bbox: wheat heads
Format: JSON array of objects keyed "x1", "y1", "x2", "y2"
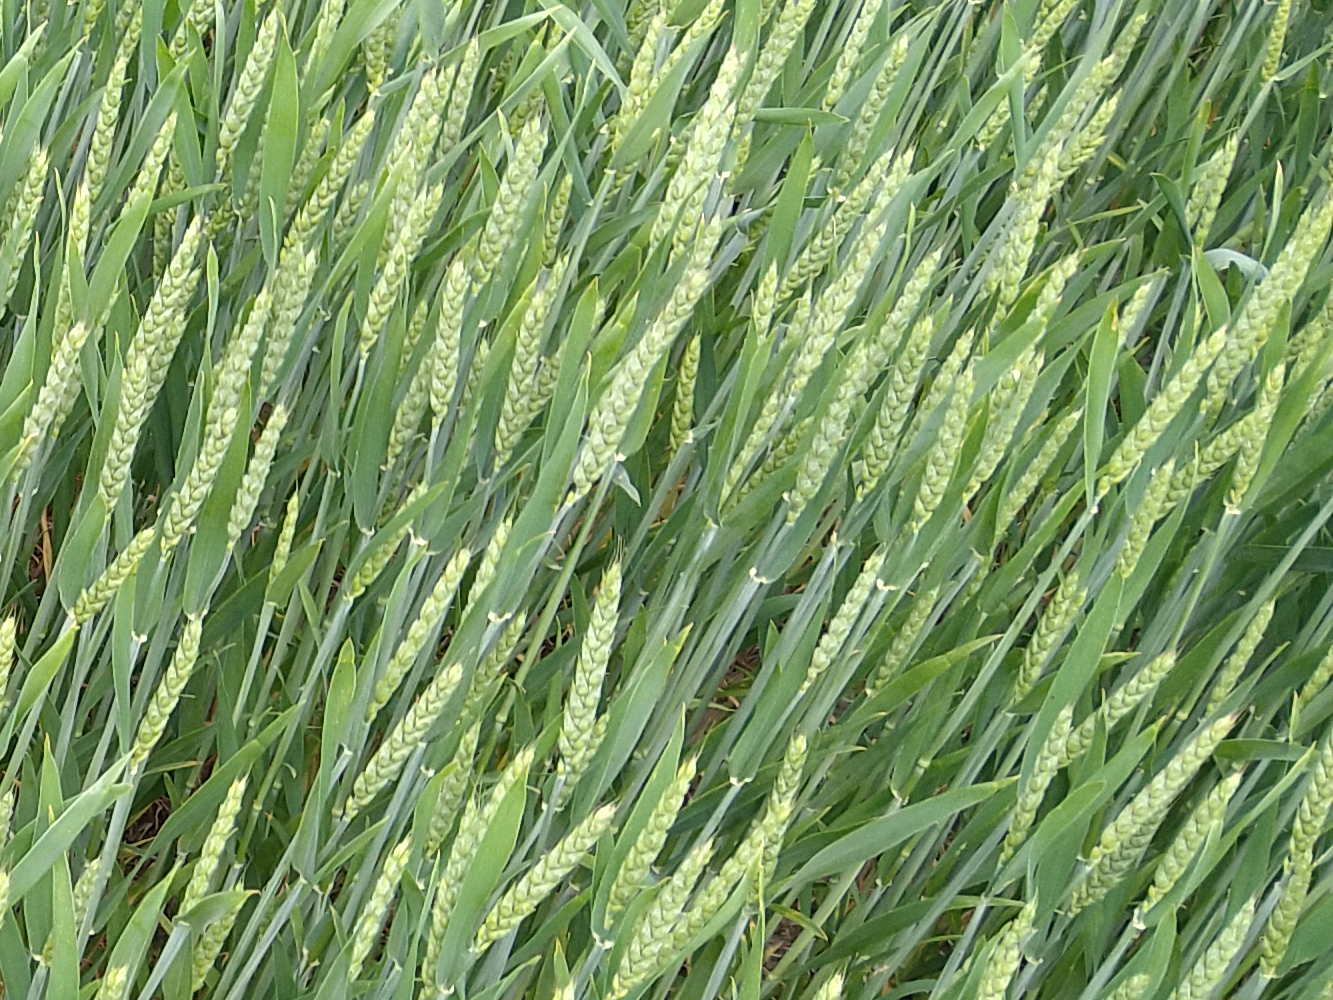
[
  {"x1": 1155, "y1": 402, "x2": 1273, "y2": 517},
  {"x1": 1198, "y1": 139, "x2": 1239, "y2": 247},
  {"x1": 1032, "y1": 63, "x2": 1111, "y2": 174},
  {"x1": 348, "y1": 838, "x2": 414, "y2": 979},
  {"x1": 263, "y1": 494, "x2": 294, "y2": 595},
  {"x1": 622, "y1": 14, "x2": 667, "y2": 112},
  {"x1": 479, "y1": 28, "x2": 528, "y2": 96},
  {"x1": 1261, "y1": 862, "x2": 1315, "y2": 972},
  {"x1": 57, "y1": 186, "x2": 90, "y2": 311},
  {"x1": 192, "y1": 901, "x2": 243, "y2": 987},
  {"x1": 1105, "y1": 461, "x2": 1171, "y2": 571},
  {"x1": 649, "y1": 275, "x2": 709, "y2": 343},
  {"x1": 1099, "y1": 330, "x2": 1227, "y2": 490},
  {"x1": 229, "y1": 95, "x2": 277, "y2": 201},
  {"x1": 280, "y1": 109, "x2": 376, "y2": 260},
  {"x1": 1299, "y1": 983, "x2": 1333, "y2": 1000},
  {"x1": 1115, "y1": 281, "x2": 1154, "y2": 348},
  {"x1": 990, "y1": 409, "x2": 1080, "y2": 530},
  {"x1": 1229, "y1": 360, "x2": 1287, "y2": 510},
  {"x1": 800, "y1": 222, "x2": 884, "y2": 354},
  {"x1": 1277, "y1": 752, "x2": 1333, "y2": 884},
  {"x1": 542, "y1": 176, "x2": 572, "y2": 257},
  {"x1": 997, "y1": 704, "x2": 1075, "y2": 863},
  {"x1": 704, "y1": 817, "x2": 781, "y2": 912},
  {"x1": 751, "y1": 735, "x2": 809, "y2": 884},
  {"x1": 180, "y1": 779, "x2": 248, "y2": 913},
  {"x1": 780, "y1": 289, "x2": 816, "y2": 356},
  {"x1": 496, "y1": 267, "x2": 570, "y2": 462},
  {"x1": 791, "y1": 153, "x2": 892, "y2": 287},
  {"x1": 203, "y1": 15, "x2": 284, "y2": 168},
  {"x1": 340, "y1": 667, "x2": 464, "y2": 814},
  {"x1": 155, "y1": 154, "x2": 190, "y2": 288},
  {"x1": 1053, "y1": 102, "x2": 1120, "y2": 189},
  {"x1": 827, "y1": 39, "x2": 912, "y2": 182},
  {"x1": 426, "y1": 807, "x2": 476, "y2": 968},
  {"x1": 466, "y1": 610, "x2": 527, "y2": 720},
  {"x1": 1293, "y1": 652, "x2": 1333, "y2": 719},
  {"x1": 379, "y1": 74, "x2": 435, "y2": 172},
  {"x1": 0, "y1": 786, "x2": 15, "y2": 887},
  {"x1": 1061, "y1": 651, "x2": 1178, "y2": 767},
  {"x1": 473, "y1": 514, "x2": 513, "y2": 601},
  {"x1": 789, "y1": 356, "x2": 870, "y2": 501},
  {"x1": 47, "y1": 860, "x2": 103, "y2": 956},
  {"x1": 614, "y1": 16, "x2": 649, "y2": 83},
  {"x1": 80, "y1": 58, "x2": 127, "y2": 197},
  {"x1": 1255, "y1": 0, "x2": 1302, "y2": 76},
  {"x1": 798, "y1": 551, "x2": 885, "y2": 691},
  {"x1": 821, "y1": 0, "x2": 891, "y2": 101},
  {"x1": 208, "y1": 284, "x2": 275, "y2": 423},
  {"x1": 673, "y1": 107, "x2": 739, "y2": 249},
  {"x1": 1206, "y1": 241, "x2": 1308, "y2": 396},
  {"x1": 73, "y1": 532, "x2": 153, "y2": 625},
  {"x1": 129, "y1": 220, "x2": 202, "y2": 367},
  {"x1": 365, "y1": 548, "x2": 473, "y2": 719},
  {"x1": 431, "y1": 257, "x2": 471, "y2": 423},
  {"x1": 398, "y1": 291, "x2": 435, "y2": 362},
  {"x1": 1030, "y1": 0, "x2": 1081, "y2": 53},
  {"x1": 905, "y1": 374, "x2": 973, "y2": 528},
  {"x1": 1209, "y1": 599, "x2": 1276, "y2": 723},
  {"x1": 117, "y1": 0, "x2": 185, "y2": 63},
  {"x1": 690, "y1": 221, "x2": 724, "y2": 289},
  {"x1": 577, "y1": 330, "x2": 669, "y2": 489},
  {"x1": 365, "y1": 184, "x2": 443, "y2": 335},
  {"x1": 716, "y1": 360, "x2": 819, "y2": 505},
  {"x1": 670, "y1": 336, "x2": 702, "y2": 443},
  {"x1": 870, "y1": 253, "x2": 943, "y2": 374},
  {"x1": 279, "y1": 119, "x2": 332, "y2": 216},
  {"x1": 604, "y1": 755, "x2": 698, "y2": 935},
  {"x1": 974, "y1": 146, "x2": 1061, "y2": 307},
  {"x1": 427, "y1": 720, "x2": 482, "y2": 854},
  {"x1": 1087, "y1": 719, "x2": 1237, "y2": 867},
  {"x1": 231, "y1": 405, "x2": 290, "y2": 532},
  {"x1": 1143, "y1": 898, "x2": 1255, "y2": 1000},
  {"x1": 961, "y1": 354, "x2": 1045, "y2": 501},
  {"x1": 0, "y1": 151, "x2": 52, "y2": 295},
  {"x1": 1092, "y1": 14, "x2": 1149, "y2": 94},
  {"x1": 476, "y1": 123, "x2": 546, "y2": 264},
  {"x1": 471, "y1": 806, "x2": 616, "y2": 956},
  {"x1": 731, "y1": 0, "x2": 818, "y2": 132},
  {"x1": 905, "y1": 331, "x2": 974, "y2": 451},
  {"x1": 140, "y1": 617, "x2": 203, "y2": 758},
  {"x1": 1068, "y1": 803, "x2": 1174, "y2": 901},
  {"x1": 136, "y1": 313, "x2": 183, "y2": 417},
  {"x1": 846, "y1": 322, "x2": 933, "y2": 492},
  {"x1": 649, "y1": 52, "x2": 752, "y2": 241},
  {"x1": 1026, "y1": 83, "x2": 1048, "y2": 119},
  {"x1": 79, "y1": 0, "x2": 115, "y2": 39},
  {"x1": 117, "y1": 114, "x2": 178, "y2": 228},
  {"x1": 362, "y1": 15, "x2": 386, "y2": 92},
  {"x1": 382, "y1": 350, "x2": 432, "y2": 467},
  {"x1": 977, "y1": 268, "x2": 1072, "y2": 405},
  {"x1": 323, "y1": 0, "x2": 359, "y2": 45},
  {"x1": 100, "y1": 368, "x2": 153, "y2": 504},
  {"x1": 7, "y1": 322, "x2": 93, "y2": 482},
  {"x1": 643, "y1": 0, "x2": 727, "y2": 111},
  {"x1": 977, "y1": 56, "x2": 1040, "y2": 147},
  {"x1": 937, "y1": 909, "x2": 1036, "y2": 1000},
  {"x1": 535, "y1": 343, "x2": 563, "y2": 415},
  {"x1": 1178, "y1": 153, "x2": 1225, "y2": 221},
  {"x1": 480, "y1": 745, "x2": 533, "y2": 856},
  {"x1": 433, "y1": 38, "x2": 483, "y2": 162},
  {"x1": 384, "y1": 65, "x2": 456, "y2": 258},
  {"x1": 329, "y1": 181, "x2": 374, "y2": 260},
  {"x1": 854, "y1": 147, "x2": 914, "y2": 249},
  {"x1": 164, "y1": 410, "x2": 238, "y2": 536},
  {"x1": 554, "y1": 561, "x2": 623, "y2": 778},
  {"x1": 257, "y1": 249, "x2": 317, "y2": 403},
  {"x1": 1039, "y1": 0, "x2": 1096, "y2": 25},
  {"x1": 172, "y1": 0, "x2": 280, "y2": 58},
  {"x1": 605, "y1": 838, "x2": 706, "y2": 1000},
  {"x1": 878, "y1": 591, "x2": 937, "y2": 689},
  {"x1": 749, "y1": 261, "x2": 777, "y2": 336},
  {"x1": 1136, "y1": 772, "x2": 1242, "y2": 925},
  {"x1": 552, "y1": 719, "x2": 614, "y2": 800},
  {"x1": 0, "y1": 616, "x2": 15, "y2": 751},
  {"x1": 550, "y1": 16, "x2": 564, "y2": 54},
  {"x1": 1010, "y1": 577, "x2": 1093, "y2": 713}
]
